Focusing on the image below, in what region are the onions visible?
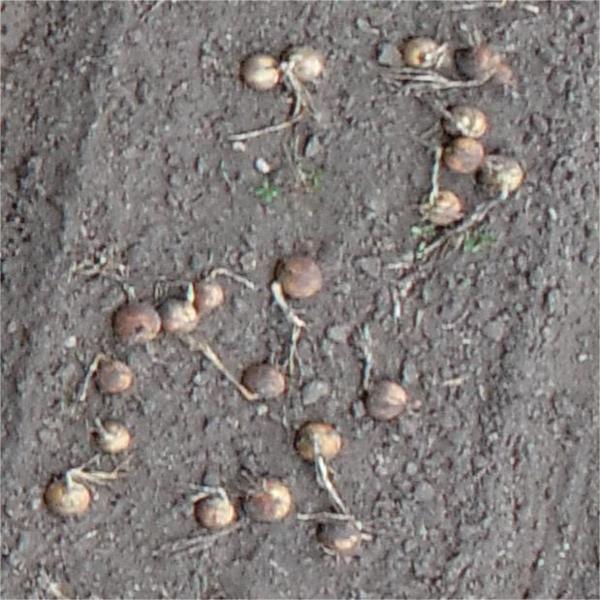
[195,282,225,312]
[479,154,523,199]
[239,51,277,89]
[455,44,501,81]
[289,48,325,82]
[193,490,232,530]
[94,357,131,393]
[436,41,468,80]
[424,187,462,225]
[277,256,321,299]
[443,137,482,175]
[243,363,282,400]
[246,480,290,523]
[495,66,514,84]
[295,422,340,460]
[44,472,88,516]
[366,376,406,420]
[160,298,196,334]
[401,36,438,69]
[321,515,362,553]
[113,300,158,344]
[448,104,488,140]
[96,420,132,454]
